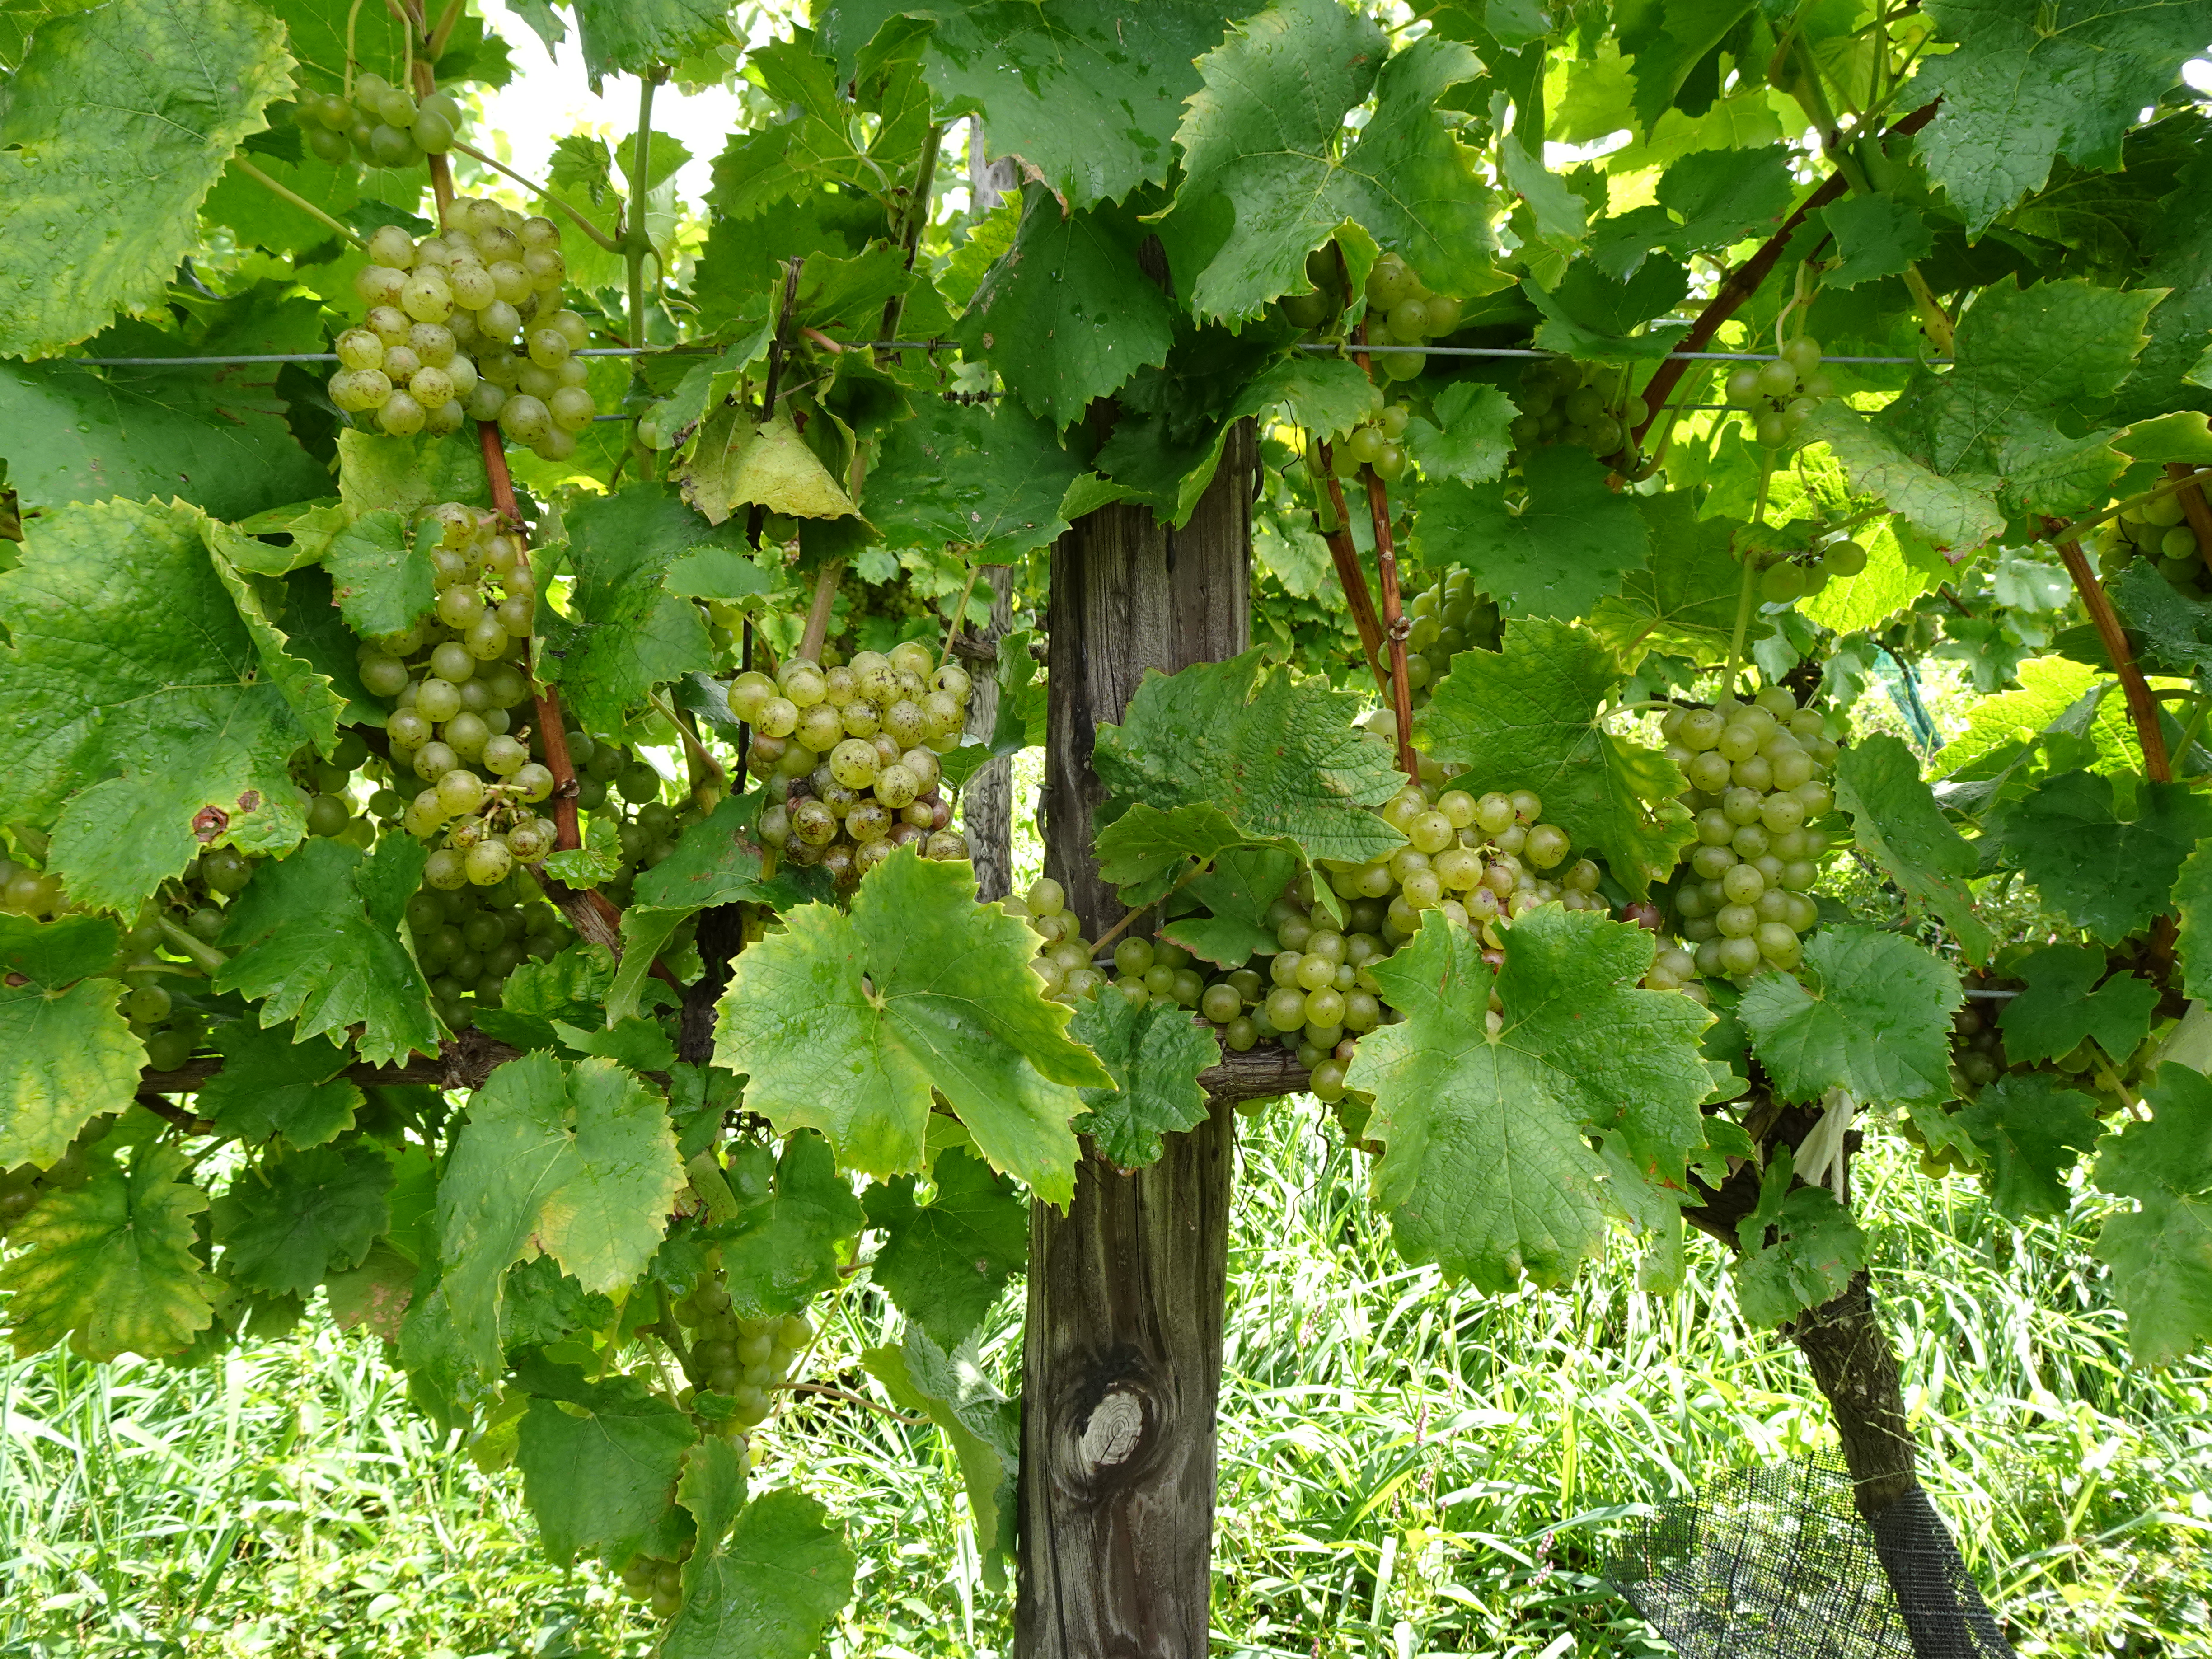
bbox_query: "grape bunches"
[205,728,366,895]
[290,73,461,169]
[638,404,677,449]
[528,697,633,810]
[621,1539,695,1620]
[996,878,1107,1001]
[2052,1008,2165,1121]
[1507,357,1648,468]
[50,830,226,1073]
[1115,938,1203,1014]
[674,1247,812,1468]
[728,643,972,912]
[1381,788,1611,1013]
[2099,468,2212,611]
[589,764,708,954]
[327,225,495,438]
[406,866,574,1031]
[1379,567,1503,714]
[1759,540,1866,603]
[1280,248,1459,382]
[1726,335,1834,450]
[1348,707,1462,790]
[690,595,745,651]
[443,196,595,462]
[0,849,54,925]
[1203,872,1390,1107]
[1903,966,2030,1179]
[1622,902,1708,1009]
[356,502,558,889]
[1660,686,1839,992]
[1328,390,1410,487]
[1317,786,1433,901]
[349,779,413,849]
[0,1110,117,1239]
